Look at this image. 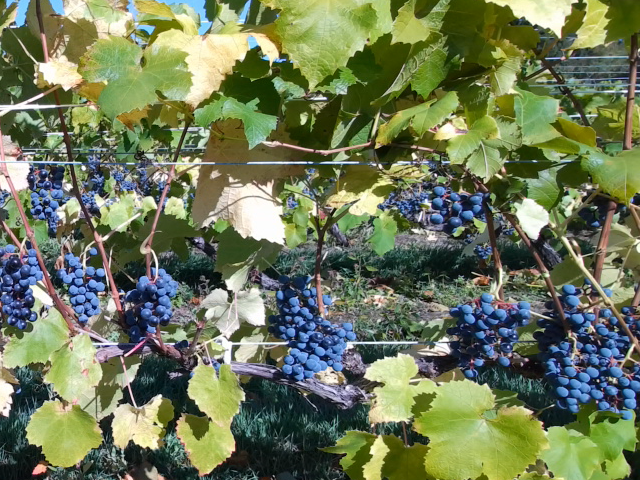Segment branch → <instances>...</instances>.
<instances>
[{"label":"branch","instance_id":"30e6481e","mask_svg":"<svg viewBox=\"0 0 640 480\" xmlns=\"http://www.w3.org/2000/svg\"><path fill=\"white\" fill-rule=\"evenodd\" d=\"M614 210H615V203L613 201H610L608 203L607 211L605 213L604 227L601 234V238L599 240V245L597 248V253L595 257V263L593 265L592 274L586 269L584 264L581 262V259L579 258V256L576 254L574 249L570 246V243L567 239L565 232L563 230L557 229L556 233L560 238L562 245L567 249L569 254L572 256V258L576 262V265L580 268L581 272L588 278L589 282L594 287V289L601 295L603 300L608 304L614 317L620 324V327L627 334V337L630 339L632 347L635 349L637 353H640V344L636 335L626 326L624 320L622 319L618 310L616 309L613 301L609 299V297L606 295L603 289L599 286V284L601 283L600 279H601V272H602V259L604 256V250H605L606 243H607L608 236L611 229L612 215L614 213Z\"/></svg>","mask_w":640,"mask_h":480},{"label":"branch","instance_id":"afce2bb1","mask_svg":"<svg viewBox=\"0 0 640 480\" xmlns=\"http://www.w3.org/2000/svg\"><path fill=\"white\" fill-rule=\"evenodd\" d=\"M457 168L463 170L467 175H469L472 179H474L473 183L475 184L476 189L478 191H481L483 188L485 193L490 192V189L485 184V182L478 175L472 172L467 166H465L464 164H458Z\"/></svg>","mask_w":640,"mask_h":480},{"label":"branch","instance_id":"46de074c","mask_svg":"<svg viewBox=\"0 0 640 480\" xmlns=\"http://www.w3.org/2000/svg\"><path fill=\"white\" fill-rule=\"evenodd\" d=\"M0 227L2 228L3 232L9 237L10 241L15 246H18L20 244V241L18 240L17 236L9 228V226L6 224V222L3 219H0Z\"/></svg>","mask_w":640,"mask_h":480},{"label":"branch","instance_id":"170604dd","mask_svg":"<svg viewBox=\"0 0 640 480\" xmlns=\"http://www.w3.org/2000/svg\"><path fill=\"white\" fill-rule=\"evenodd\" d=\"M69 169H70V172H71V183H72V187H73L74 196L77 199V201L81 204V208H82L83 214L85 215V217L87 219V222L90 224V227H91V229L93 231L94 238H95V240L97 242V246H98V248L100 250L101 258H102V261H103L104 266H105V272L108 275L109 282H110V285H111V288H112V291H113V294H114V298H115V301H116V313L118 314L119 319L123 320V330L127 331L128 330V318H127L125 310H124L123 302L120 299V295H119V292H118V289H117V285L115 283L114 276H113V273L111 271V267H110V264H109V260H108L107 255H106L105 247L103 246L101 237H100L99 232H98V228L95 225V222L92 219V217H91V215H90V213L88 211L87 205H86V203L84 202V200L81 198V196L79 194L77 180H76V169H75V167L73 165H70Z\"/></svg>","mask_w":640,"mask_h":480},{"label":"branch","instance_id":"1af6ec82","mask_svg":"<svg viewBox=\"0 0 640 480\" xmlns=\"http://www.w3.org/2000/svg\"><path fill=\"white\" fill-rule=\"evenodd\" d=\"M482 205L484 206L485 209V213H486V220L488 223V229H489V236L491 239V248L494 252L495 255V269H496V286L499 282V274H498V267L501 266V257H500V250L498 248L496 239H495V219L493 214L490 211V207L487 201H483Z\"/></svg>","mask_w":640,"mask_h":480},{"label":"branch","instance_id":"a944a4c4","mask_svg":"<svg viewBox=\"0 0 640 480\" xmlns=\"http://www.w3.org/2000/svg\"><path fill=\"white\" fill-rule=\"evenodd\" d=\"M58 118H59V121H60V126L62 128L61 135H62L63 141H64L66 157H67L68 160H73V157H72L71 151H70V138H69V136L67 135V132H66V118H65V113H64V109L63 108L59 109Z\"/></svg>","mask_w":640,"mask_h":480},{"label":"branch","instance_id":"8bde2521","mask_svg":"<svg viewBox=\"0 0 640 480\" xmlns=\"http://www.w3.org/2000/svg\"><path fill=\"white\" fill-rule=\"evenodd\" d=\"M389 146L393 147V148H405V149H412V150H421V151H426V152L433 153L435 155H439V156H441L443 158L447 157V154L445 152H443L442 150H437L435 148L428 147V146H423V145H414V144H407V143L390 142Z\"/></svg>","mask_w":640,"mask_h":480},{"label":"branch","instance_id":"2b1400db","mask_svg":"<svg viewBox=\"0 0 640 480\" xmlns=\"http://www.w3.org/2000/svg\"><path fill=\"white\" fill-rule=\"evenodd\" d=\"M36 16H37V31L42 41V49H43V62H48V47H47V38L42 29V2L41 0H36Z\"/></svg>","mask_w":640,"mask_h":480},{"label":"branch","instance_id":"45aa463d","mask_svg":"<svg viewBox=\"0 0 640 480\" xmlns=\"http://www.w3.org/2000/svg\"><path fill=\"white\" fill-rule=\"evenodd\" d=\"M504 215L507 217V219L513 224V226L521 233L523 238L526 240L527 245H528L531 253L533 254V258L535 259L537 267L540 270V273L542 275L543 281H544L545 285L547 286V289L550 291V293L552 295V298H553L554 303H555L556 311H557L558 317L560 318L562 326L566 331H569L571 329V325H570V323L568 321V318H567V316L565 314L560 295H559L557 289L553 286V282H552V280L550 278L549 272H548L546 266L544 265V261L542 260L540 252L538 251L533 238L528 233V231L524 228V226L518 221V219L509 210H506L504 212Z\"/></svg>","mask_w":640,"mask_h":480},{"label":"branch","instance_id":"725ea6d5","mask_svg":"<svg viewBox=\"0 0 640 480\" xmlns=\"http://www.w3.org/2000/svg\"><path fill=\"white\" fill-rule=\"evenodd\" d=\"M156 340L158 343V346L160 347L162 352L166 351V347L163 345V341H162V337H161V324L157 323L156 324Z\"/></svg>","mask_w":640,"mask_h":480},{"label":"branch","instance_id":"ea751061","mask_svg":"<svg viewBox=\"0 0 640 480\" xmlns=\"http://www.w3.org/2000/svg\"><path fill=\"white\" fill-rule=\"evenodd\" d=\"M373 144L372 140H367V141H363L360 143H354L345 147H342L340 149H335V150H325V149H318V148H314V147H304L302 145L299 144H287V143H282V142H278V141H274V140H266V141H262L261 145L262 146H276V147H280V148H285V149H297L300 150L302 152H311V153H316V154H323V155H338V154H342L344 152L356 149V148H362L365 146H370Z\"/></svg>","mask_w":640,"mask_h":480},{"label":"branch","instance_id":"982ccf7c","mask_svg":"<svg viewBox=\"0 0 640 480\" xmlns=\"http://www.w3.org/2000/svg\"><path fill=\"white\" fill-rule=\"evenodd\" d=\"M638 39L639 34L634 32L631 37L630 48V75L627 86V102H626V116H625V129L623 136V148L628 150L631 147V131H632V118H633V105H634V89L638 72L637 65V51H638Z\"/></svg>","mask_w":640,"mask_h":480},{"label":"branch","instance_id":"1d269e1b","mask_svg":"<svg viewBox=\"0 0 640 480\" xmlns=\"http://www.w3.org/2000/svg\"><path fill=\"white\" fill-rule=\"evenodd\" d=\"M158 101H159V102H162L165 106H168V107H170V108H173V109H175L176 111H178V112H180L181 114H184L185 116H187V117H188L187 122H186V125H185L184 130H183V133H182L181 137L179 138V141H178V145H177L176 151H175L174 156H173V158H172V161H173V162H176V161L178 160L179 156H180V153H181V151H182V147H183V143H184V141H185V139H186V137H187V135H188V132H189L190 127H191V124H192V119H194V118H195V115H194V114H192V113H191L190 111H188L187 109H183L181 106H179V105H177V104H175V103H173V102H170V101L166 100L164 97H159V98H158Z\"/></svg>","mask_w":640,"mask_h":480},{"label":"branch","instance_id":"1ff4a987","mask_svg":"<svg viewBox=\"0 0 640 480\" xmlns=\"http://www.w3.org/2000/svg\"><path fill=\"white\" fill-rule=\"evenodd\" d=\"M174 172H175V166L171 165L170 166V170H169V175L165 184V187L163 188L161 194H160V198H159V202H158V207L156 209V213L154 215V218L152 220L151 223V232L148 235V239H147V244H146V275L148 279L152 278V272H151V246H152V241L153 238L155 237L156 234V225L158 223V220L160 218L162 209H163V205H164V201H165V197L167 192L170 190L172 181H173V177H174Z\"/></svg>","mask_w":640,"mask_h":480},{"label":"branch","instance_id":"325d2c04","mask_svg":"<svg viewBox=\"0 0 640 480\" xmlns=\"http://www.w3.org/2000/svg\"><path fill=\"white\" fill-rule=\"evenodd\" d=\"M0 171H1V175L3 176L5 183L8 187L10 196L12 198V201L14 202V204L16 205V210L18 213V216L23 220V225H24V229H25V233L27 236V239L30 243V246L32 247L34 253L36 254V258H37V262L38 265L40 267L41 273L44 277V279L42 280V286L43 288H45L47 290V292L52 296L53 299L55 301L56 307L59 310L60 316L62 318V320L64 321V323L66 324V326L70 329L73 330L75 328V325L73 324V322L71 321L69 315L67 314L66 308L62 302L61 296L58 292L57 286L52 278V276L50 275V272L48 270V267L45 263L44 260V256H43V252L40 249L39 244L37 243L35 236L33 234V230L32 227L28 224L27 220L25 219L26 217V213L24 211V207H23V203L21 201V199L18 197L15 185L12 181V178L10 176V174L8 173V169L6 168V165H0Z\"/></svg>","mask_w":640,"mask_h":480},{"label":"branch","instance_id":"ca6c30ca","mask_svg":"<svg viewBox=\"0 0 640 480\" xmlns=\"http://www.w3.org/2000/svg\"><path fill=\"white\" fill-rule=\"evenodd\" d=\"M331 224H332V222H331V220L329 218V219H326L324 224L321 226L320 233H319V241H318L317 250H316V257H315V267H316L315 286H316L317 313L321 317H324L325 313L322 310L323 293L321 292V264H320V259H321L322 247H323V243H324L325 231Z\"/></svg>","mask_w":640,"mask_h":480},{"label":"branch","instance_id":"7c5c6f52","mask_svg":"<svg viewBox=\"0 0 640 480\" xmlns=\"http://www.w3.org/2000/svg\"><path fill=\"white\" fill-rule=\"evenodd\" d=\"M204 129L209 133V135L211 137L214 138H218L221 139L223 141H234V142H239V143H246L247 139L246 138H242V137H236V136H226L220 133H216L212 130V128L209 125H205Z\"/></svg>","mask_w":640,"mask_h":480}]
</instances>
